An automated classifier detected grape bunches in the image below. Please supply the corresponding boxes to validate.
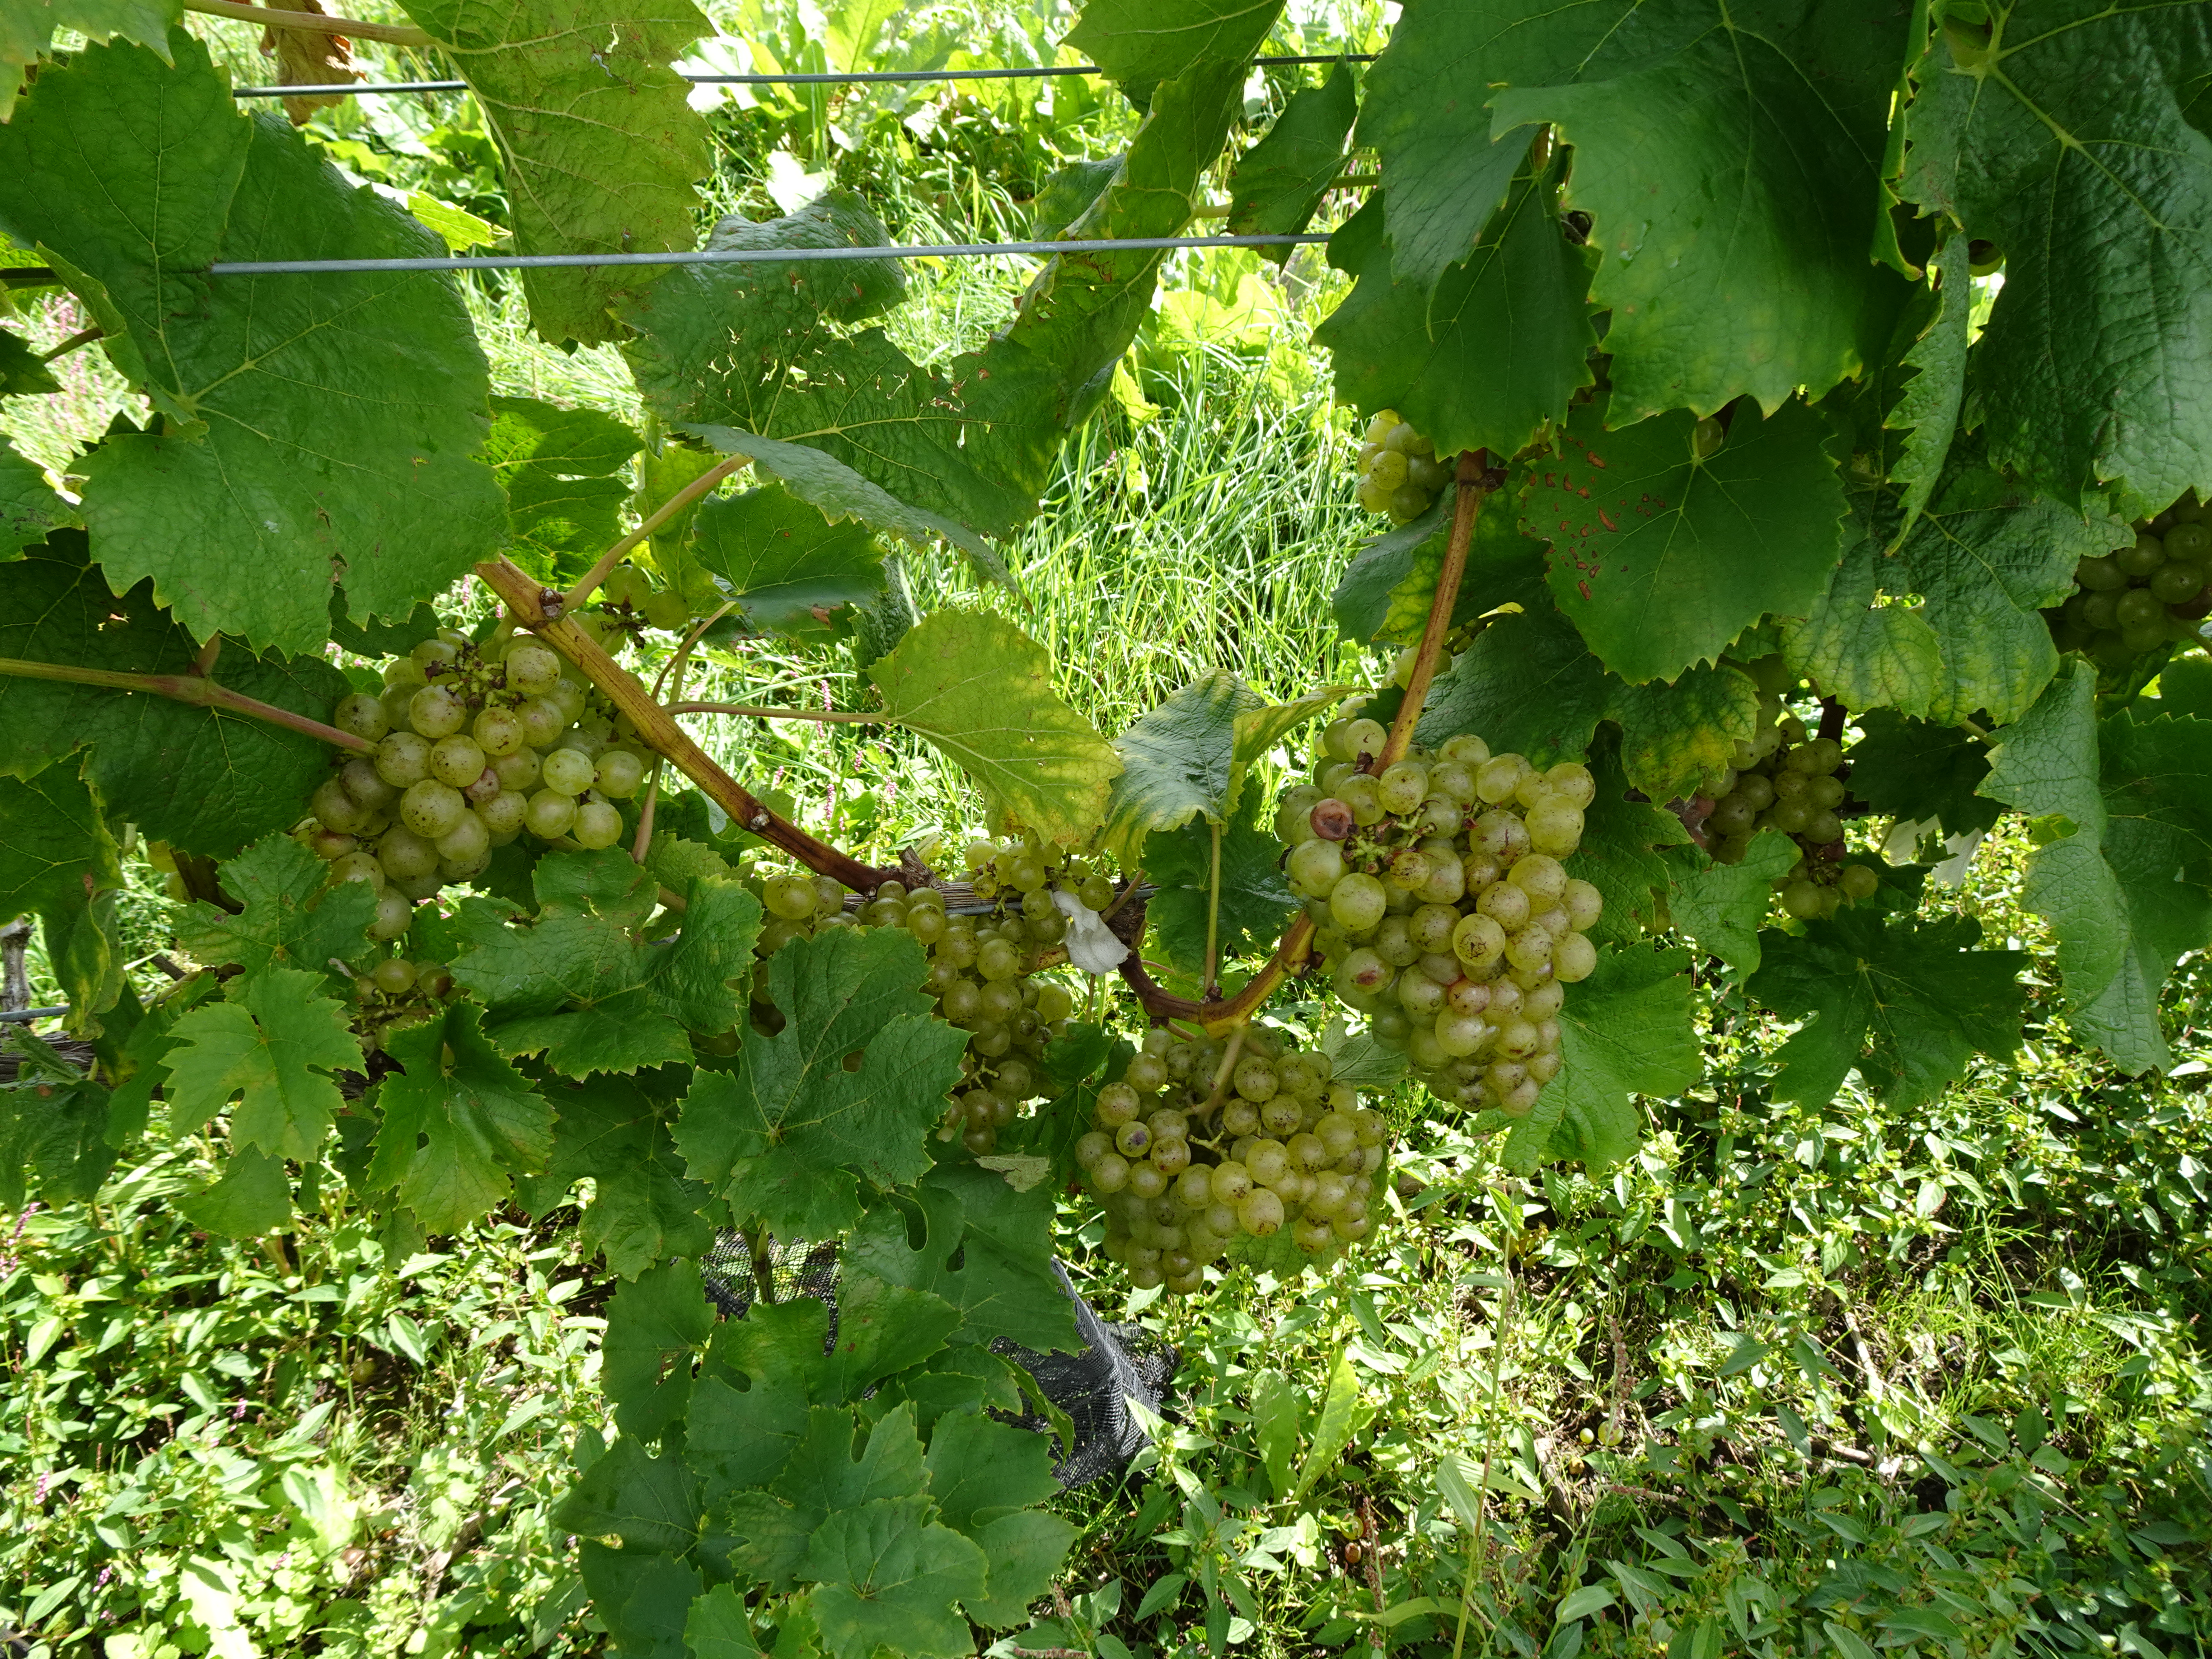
[1676,718,1880,921]
[293,611,662,939]
[853,879,1072,1156]
[2045,488,2212,669]
[1074,1024,1386,1293]
[587,564,687,659]
[691,865,862,1057]
[967,827,1115,977]
[1697,415,1725,458]
[1274,718,1604,1116]
[350,951,469,1067]
[1712,623,1800,770]
[1355,410,1456,526]
[1336,616,1487,718]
